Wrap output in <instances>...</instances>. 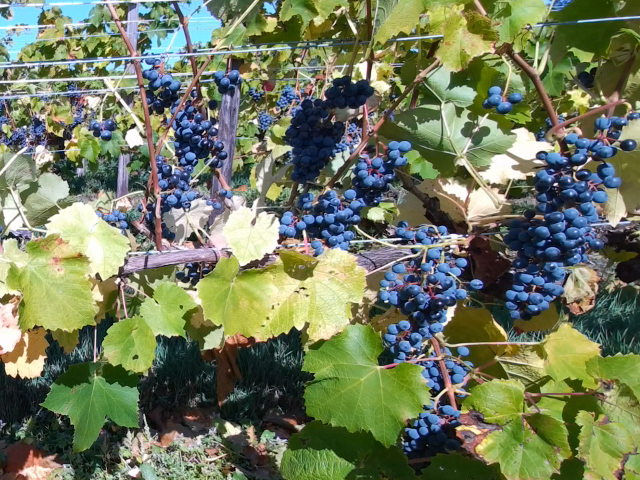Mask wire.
<instances>
[{
	"instance_id": "wire-1",
	"label": "wire",
	"mask_w": 640,
	"mask_h": 480,
	"mask_svg": "<svg viewBox=\"0 0 640 480\" xmlns=\"http://www.w3.org/2000/svg\"><path fill=\"white\" fill-rule=\"evenodd\" d=\"M356 41H335L328 43H313V44H300V45H290V46H281V47H273V48H247L242 50H217V51H193V52H178L172 54H161V55H145V56H111V55H103L96 56L93 58H85V59H56L51 60L49 62H40V63H25V62H6L0 64V69L9 68V67H23V68H42V67H51L58 64H87V63H95L98 61H147V60H163V59H174L180 57H195V56H219V55H245L249 53H275V52H283V51H292V50H302V49H316V48H331L338 46H356Z\"/></svg>"
},
{
	"instance_id": "wire-2",
	"label": "wire",
	"mask_w": 640,
	"mask_h": 480,
	"mask_svg": "<svg viewBox=\"0 0 640 480\" xmlns=\"http://www.w3.org/2000/svg\"><path fill=\"white\" fill-rule=\"evenodd\" d=\"M136 79H137L136 75L116 73L115 76L91 75V76H80V77H44V78H32V79L15 80V81L0 80V85L17 86V85H26V84H34V83L82 82V81H93V80L125 82V81L136 80Z\"/></svg>"
},
{
	"instance_id": "wire-3",
	"label": "wire",
	"mask_w": 640,
	"mask_h": 480,
	"mask_svg": "<svg viewBox=\"0 0 640 480\" xmlns=\"http://www.w3.org/2000/svg\"><path fill=\"white\" fill-rule=\"evenodd\" d=\"M640 19V14L631 15L627 17H614V18H585V19H568L561 21H550L539 24H526L525 29H542L553 26H563L570 24H587V23H616V22H629Z\"/></svg>"
},
{
	"instance_id": "wire-4",
	"label": "wire",
	"mask_w": 640,
	"mask_h": 480,
	"mask_svg": "<svg viewBox=\"0 0 640 480\" xmlns=\"http://www.w3.org/2000/svg\"><path fill=\"white\" fill-rule=\"evenodd\" d=\"M444 34H436V35H409V36H399V37H391L389 39L390 43L393 42H401V41H411V40H438L444 39Z\"/></svg>"
},
{
	"instance_id": "wire-5",
	"label": "wire",
	"mask_w": 640,
	"mask_h": 480,
	"mask_svg": "<svg viewBox=\"0 0 640 480\" xmlns=\"http://www.w3.org/2000/svg\"><path fill=\"white\" fill-rule=\"evenodd\" d=\"M181 248H170V249H162V250H146V251H128L127 255H140L147 256L152 254H161V253H169V252H180Z\"/></svg>"
}]
</instances>
